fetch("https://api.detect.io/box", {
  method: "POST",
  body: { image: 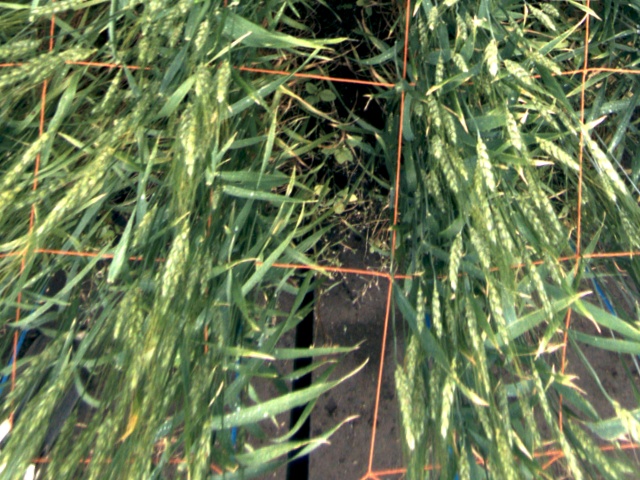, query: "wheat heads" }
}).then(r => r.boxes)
[193,18,208,50]
[589,132,626,194]
[517,193,547,239]
[6,52,66,80]
[476,402,491,438]
[407,339,416,374]
[113,286,131,339]
[47,415,75,475]
[189,428,217,479]
[448,53,469,73]
[485,285,509,339]
[36,0,91,22]
[90,418,115,480]
[427,173,439,198]
[493,206,513,252]
[503,109,522,151]
[532,53,560,75]
[217,59,236,103]
[19,418,50,476]
[540,189,569,232]
[507,16,526,38]
[459,447,472,480]
[530,367,555,425]
[541,2,563,20]
[486,42,500,77]
[569,423,613,473]
[31,369,78,439]
[1,340,60,403]
[426,5,440,26]
[139,37,148,58]
[31,167,79,207]
[137,207,156,243]
[128,309,143,398]
[143,323,179,408]
[621,213,637,248]
[202,256,214,290]
[426,369,439,415]
[65,414,101,472]
[542,136,581,174]
[2,182,26,215]
[445,237,465,290]
[393,368,417,443]
[434,57,443,98]
[476,186,498,244]
[454,14,467,38]
[430,287,443,334]
[415,292,424,330]
[192,353,212,410]
[494,433,512,477]
[527,8,554,34]
[463,302,478,344]
[212,307,225,341]
[130,411,160,472]
[177,2,191,11]
[100,78,119,109]
[112,115,133,142]
[166,234,187,295]
[433,145,461,194]
[473,140,498,194]
[170,26,181,45]
[420,93,440,128]
[193,65,210,95]
[505,60,530,85]
[430,137,441,157]
[413,17,427,49]
[499,382,509,434]
[41,54,89,83]
[440,369,462,438]
[0,39,42,60]
[526,262,553,314]
[164,10,174,34]
[0,132,48,186]
[440,105,457,142]
[468,226,486,266]
[150,0,159,12]
[161,372,181,420]
[532,100,557,129]
[185,240,204,295]
[180,107,204,155]
[36,159,107,244]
